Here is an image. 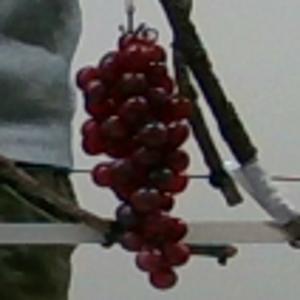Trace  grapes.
Segmentation results:
<instances>
[{
	"instance_id": "1",
	"label": "grapes",
	"mask_w": 300,
	"mask_h": 300,
	"mask_svg": "<svg viewBox=\"0 0 300 300\" xmlns=\"http://www.w3.org/2000/svg\"><path fill=\"white\" fill-rule=\"evenodd\" d=\"M118 51L86 65L75 76L90 119L80 127L81 149L89 157L111 159L95 165L92 184L111 190L123 227L117 241L135 253L137 269L150 285L171 290L179 282L175 268L190 260L186 221L172 217L174 196L185 191L188 153L180 149L191 134L187 96L175 94L165 48L133 31L122 33Z\"/></svg>"
}]
</instances>
